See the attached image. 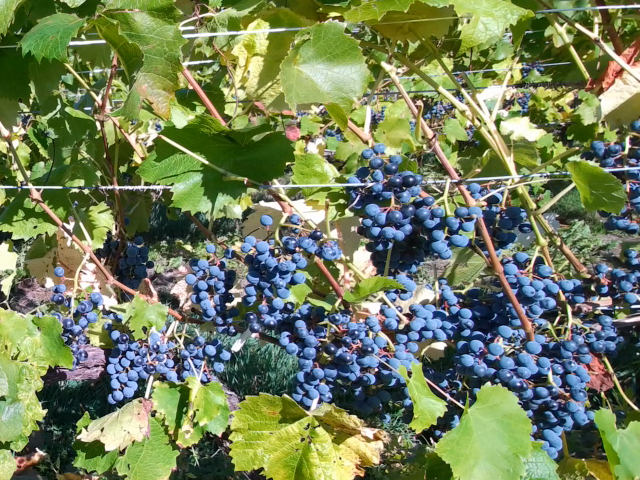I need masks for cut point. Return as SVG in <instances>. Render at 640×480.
Masks as SVG:
<instances>
[{"label":"cut point","instance_id":"7d7e1d6f","mask_svg":"<svg viewBox=\"0 0 640 480\" xmlns=\"http://www.w3.org/2000/svg\"><path fill=\"white\" fill-rule=\"evenodd\" d=\"M89 258L88 254H85L82 257V260L79 262L78 266L76 267V269L74 270V278L78 279L79 278V273L80 271L83 269L84 265L87 263V260Z\"/></svg>","mask_w":640,"mask_h":480},{"label":"cut point","instance_id":"6a23745f","mask_svg":"<svg viewBox=\"0 0 640 480\" xmlns=\"http://www.w3.org/2000/svg\"><path fill=\"white\" fill-rule=\"evenodd\" d=\"M288 216L286 215L285 211L283 212V214L280 216V219L278 221V226L275 229V240L276 241H280L282 238V230H283V224L285 219Z\"/></svg>","mask_w":640,"mask_h":480},{"label":"cut point","instance_id":"40658cd0","mask_svg":"<svg viewBox=\"0 0 640 480\" xmlns=\"http://www.w3.org/2000/svg\"><path fill=\"white\" fill-rule=\"evenodd\" d=\"M450 177H447L445 180V188L443 191V198L447 199L448 198V193L450 191V182H449Z\"/></svg>","mask_w":640,"mask_h":480},{"label":"cut point","instance_id":"deb38ca7","mask_svg":"<svg viewBox=\"0 0 640 480\" xmlns=\"http://www.w3.org/2000/svg\"><path fill=\"white\" fill-rule=\"evenodd\" d=\"M541 247H542V244H541V243H537V244L534 246V251H533V254H532V258H531V259H530V261H529V266H530V267H533V266H534V263L536 262L537 257H538V254H539V249H540Z\"/></svg>","mask_w":640,"mask_h":480}]
</instances>
